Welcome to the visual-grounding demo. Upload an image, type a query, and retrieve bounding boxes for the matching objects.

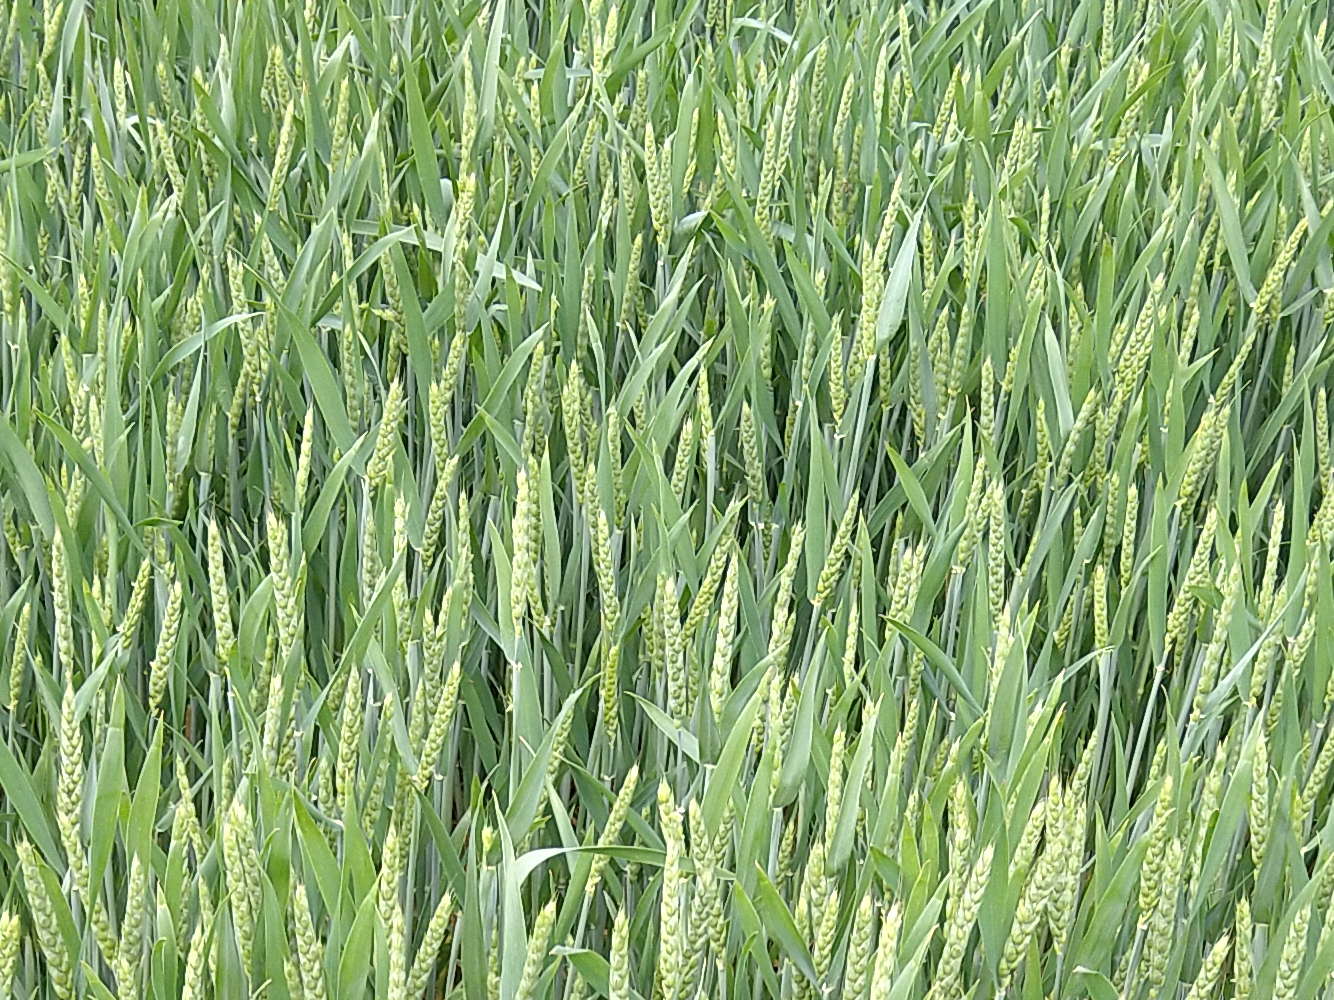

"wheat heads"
[1300,471,1334,539]
[788,887,812,1000]
[326,76,350,180]
[982,356,997,434]
[345,238,360,305]
[165,386,184,475]
[605,914,631,1000]
[1173,513,1219,632]
[533,372,561,461]
[575,264,594,357]
[170,304,206,400]
[1256,0,1279,91]
[444,334,471,392]
[99,300,108,402]
[1202,180,1232,249]
[69,469,89,522]
[221,759,233,813]
[510,897,556,1000]
[619,148,635,215]
[57,334,85,442]
[996,66,1014,107]
[1034,115,1044,160]
[911,345,926,439]
[1265,618,1318,722]
[478,232,489,256]
[415,667,464,789]
[867,907,903,1000]
[150,581,184,701]
[222,466,231,516]
[935,64,963,136]
[1017,118,1038,166]
[1262,62,1285,127]
[1075,506,1080,555]
[1139,778,1176,917]
[1094,407,1105,485]
[1213,333,1258,409]
[520,382,545,459]
[844,124,861,190]
[176,805,188,950]
[56,826,115,961]
[774,516,806,615]
[944,118,956,143]
[265,520,308,659]
[698,366,714,470]
[736,53,745,94]
[1106,323,1130,367]
[1072,728,1099,792]
[380,244,419,351]
[596,509,619,623]
[604,644,621,736]
[581,402,597,460]
[968,219,990,269]
[829,313,847,417]
[316,754,330,818]
[529,703,575,837]
[119,558,152,639]
[680,160,697,197]
[423,612,451,719]
[771,613,799,698]
[499,62,524,122]
[386,907,411,1000]
[661,833,683,1000]
[802,318,815,386]
[1295,717,1334,820]
[261,677,279,768]
[453,244,473,333]
[207,521,235,657]
[1049,866,1069,954]
[399,753,409,837]
[844,322,869,387]
[0,24,10,82]
[455,490,476,607]
[1064,807,1089,920]
[880,345,893,406]
[1109,95,1150,165]
[813,40,831,122]
[410,679,426,753]
[838,895,874,1000]
[1103,0,1115,75]
[639,601,650,660]
[706,6,719,25]
[51,532,76,689]
[655,140,670,239]
[972,745,985,780]
[887,701,921,778]
[1315,384,1330,495]
[1127,62,1144,95]
[637,126,662,231]
[812,490,860,609]
[686,801,725,953]
[577,20,591,54]
[1325,665,1334,715]
[1181,248,1210,340]
[1300,131,1314,187]
[1017,464,1040,517]
[1122,326,1159,399]
[125,850,147,959]
[535,466,541,607]
[924,219,935,285]
[1118,484,1138,584]
[560,361,586,505]
[932,741,952,778]
[381,329,405,387]
[1142,0,1156,32]
[165,477,190,516]
[590,765,639,890]
[965,457,985,520]
[1276,204,1288,252]
[677,808,734,1000]
[823,726,846,849]
[56,687,84,851]
[1058,792,1080,842]
[30,101,48,142]
[340,668,364,800]
[1256,501,1286,615]
[173,932,205,1000]
[1215,231,1229,257]
[671,418,691,503]
[914,141,921,165]
[785,398,797,447]
[1054,384,1100,488]
[1113,276,1168,377]
[36,535,54,577]
[955,486,998,564]
[870,47,886,119]
[265,288,278,342]
[202,406,219,471]
[1002,116,1023,176]
[339,326,360,427]
[1010,803,1049,871]
[267,105,298,205]
[808,847,832,943]
[635,71,652,132]
[456,174,478,244]
[759,57,766,96]
[1191,746,1227,895]
[1053,46,1073,116]
[843,607,858,682]
[604,0,616,58]
[6,603,32,703]
[158,128,186,199]
[366,478,379,511]
[1319,135,1334,172]
[930,309,952,353]
[1217,12,1233,62]
[1011,177,1028,210]
[293,884,328,1000]
[1175,614,1198,676]
[35,182,58,268]
[1000,849,1066,974]
[35,61,57,115]
[156,64,182,144]
[1313,21,1326,52]
[1067,290,1081,364]
[330,277,344,315]
[685,636,704,712]
[1096,569,1104,652]
[529,83,541,179]
[1025,259,1047,298]
[273,51,292,111]
[43,153,69,202]
[91,142,109,196]
[681,539,731,640]
[393,497,419,624]
[112,959,140,1000]
[383,821,399,914]
[222,819,264,974]
[1039,186,1051,252]
[1055,582,1089,643]
[1158,946,1230,1000]
[708,556,739,709]
[460,60,478,173]
[1177,409,1215,500]
[176,758,202,865]
[1247,219,1312,312]
[776,78,801,175]
[401,888,457,1000]
[1148,845,1185,979]
[648,576,665,673]
[1271,907,1311,1000]
[858,708,875,792]
[831,143,849,219]
[1273,775,1303,836]
[708,145,737,202]
[935,848,996,1000]
[96,689,102,758]
[653,778,685,840]
[779,821,795,875]
[256,53,276,101]
[619,237,643,323]
[427,384,449,460]
[755,112,778,234]
[936,332,948,417]
[1197,129,1221,211]
[910,642,920,697]
[1316,216,1334,313]
[487,174,500,234]
[154,526,174,580]
[98,528,107,584]
[17,840,74,1000]
[911,543,930,609]
[889,72,903,128]
[1186,409,1232,520]
[1268,286,1281,332]
[69,145,86,213]
[1247,589,1296,704]
[891,517,902,596]
[112,53,128,119]
[364,506,381,612]
[380,152,388,203]
[1072,244,1084,291]
[748,687,775,750]
[718,106,729,153]
[802,108,819,203]
[989,606,1013,705]
[1133,1,1144,41]
[1280,344,1297,402]
[593,172,615,228]
[581,1,603,69]
[946,308,974,394]
[279,956,312,1000]
[510,469,528,625]
[1165,310,1204,420]
[1100,478,1124,570]
[41,26,61,59]
[572,99,604,181]
[293,406,315,509]
[256,221,285,297]
[814,891,841,976]
[689,106,701,157]
[250,631,278,699]
[759,303,773,374]
[283,696,298,788]
[521,340,545,411]
[1321,825,1334,955]
[563,971,589,1000]
[76,268,91,331]
[947,786,971,939]
[606,406,621,521]
[764,503,773,567]
[1311,854,1334,917]
[1303,554,1318,612]
[1188,589,1237,719]
[889,547,911,619]
[741,402,765,505]
[633,379,650,444]
[814,270,827,309]
[779,678,803,746]
[852,549,861,593]
[990,486,1002,609]
[902,15,915,98]
[486,927,508,1000]
[736,85,748,143]
[426,456,460,551]
[1045,775,1072,849]
[197,190,210,253]
[0,171,10,308]
[1227,86,1250,122]
[1036,397,1047,470]
[197,103,219,190]
[0,92,10,126]
[0,909,20,995]
[802,843,827,933]
[963,197,973,282]
[662,575,685,721]
[1081,406,1123,477]
[1237,896,1257,1000]
[582,464,596,560]
[89,397,102,465]
[877,170,906,278]
[198,876,217,986]
[373,380,409,480]
[1009,219,1018,264]
[0,497,16,550]
[330,672,346,718]
[835,73,856,145]
[227,261,259,367]
[120,318,134,376]
[397,791,411,884]
[1218,640,1238,683]
[862,240,880,352]
[1249,733,1271,878]
[1147,740,1168,787]
[359,693,398,818]
[230,336,257,426]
